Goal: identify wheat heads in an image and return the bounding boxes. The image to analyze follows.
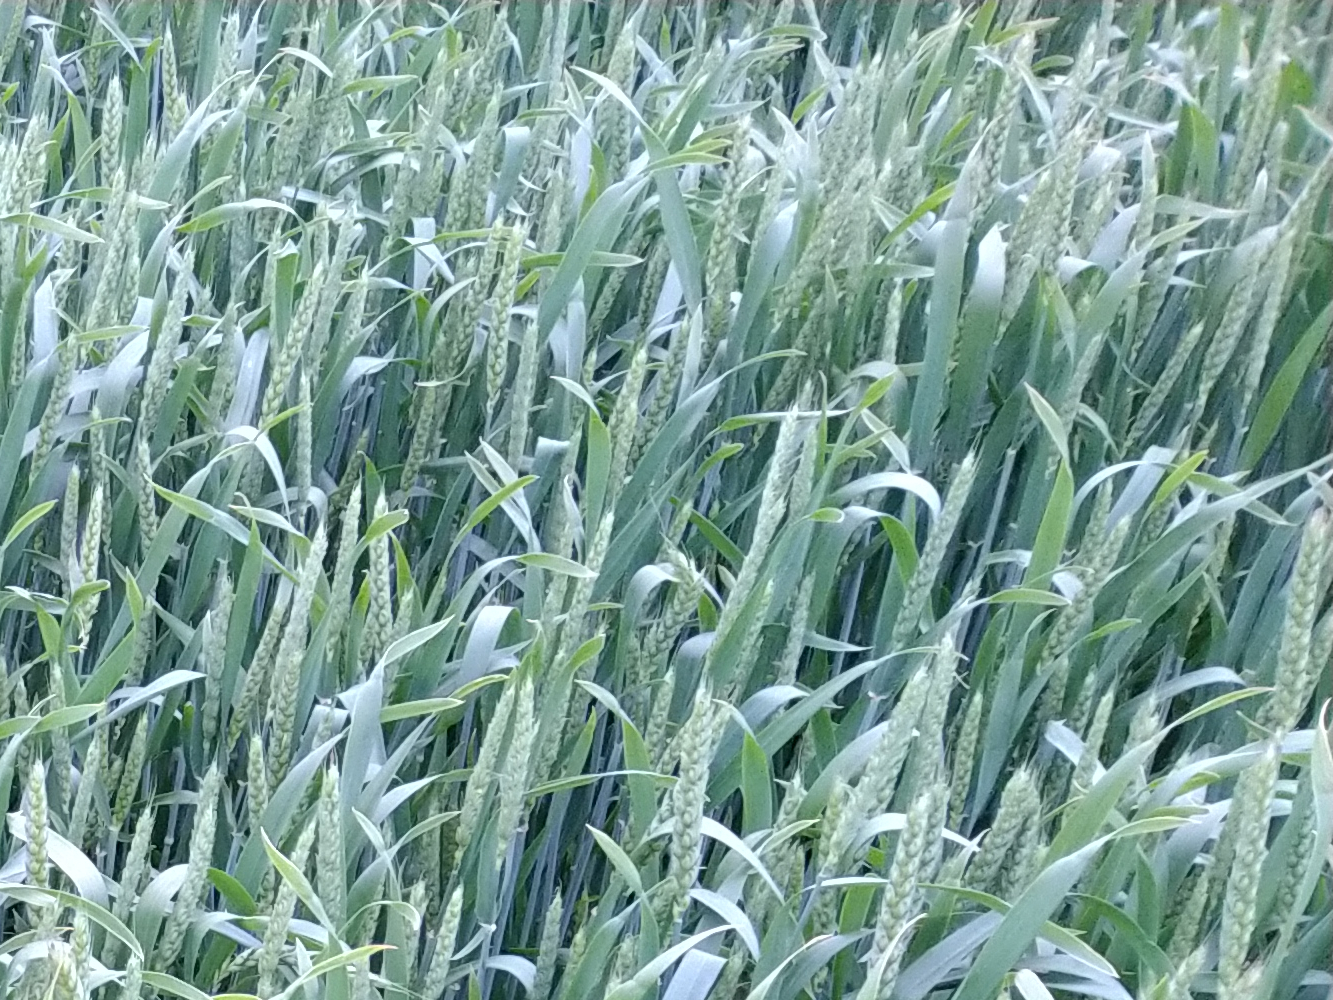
[1238,246,1294,398]
[1079,180,1102,228]
[169,95,190,127]
[1001,807,1041,901]
[359,876,387,948]
[2,1,28,64]
[50,668,71,805]
[325,486,363,649]
[227,212,246,288]
[248,735,265,827]
[438,375,453,420]
[790,429,818,521]
[1246,174,1269,236]
[1195,22,1219,65]
[623,631,639,717]
[218,120,246,197]
[817,104,860,205]
[301,27,318,100]
[0,223,18,293]
[907,169,922,214]
[748,0,767,38]
[137,442,157,556]
[269,527,327,705]
[430,290,462,377]
[262,267,324,420]
[611,877,681,987]
[448,299,475,370]
[475,223,505,304]
[101,77,122,182]
[0,144,19,220]
[948,693,983,830]
[284,0,305,40]
[797,183,871,310]
[202,581,234,741]
[1127,325,1201,438]
[552,930,589,1000]
[1042,137,1084,271]
[758,303,822,419]
[1295,614,1333,714]
[975,37,1037,220]
[389,162,413,239]
[227,592,288,741]
[444,63,467,127]
[1279,200,1317,310]
[517,673,566,837]
[1258,126,1288,226]
[1124,66,1163,129]
[887,163,918,205]
[758,406,801,528]
[635,574,703,685]
[160,32,174,144]
[1143,90,1166,123]
[630,322,690,468]
[639,238,671,325]
[457,687,515,844]
[610,406,636,504]
[412,157,446,216]
[16,679,35,784]
[562,348,595,435]
[266,94,310,230]
[1074,285,1095,319]
[61,465,80,562]
[314,211,331,267]
[524,894,563,1000]
[603,0,628,65]
[1006,172,1052,272]
[110,957,141,1000]
[1272,786,1318,925]
[0,658,9,756]
[83,47,100,88]
[86,200,134,340]
[1077,481,1114,565]
[444,156,471,241]
[943,291,972,393]
[712,694,734,757]
[402,385,437,489]
[1082,77,1121,149]
[908,638,957,800]
[1125,694,1155,760]
[747,778,804,915]
[153,806,219,969]
[466,20,506,117]
[1218,758,1278,992]
[1185,43,1198,102]
[550,0,571,92]
[604,352,646,450]
[73,740,103,844]
[1073,23,1096,72]
[591,90,608,154]
[316,0,329,22]
[711,502,782,650]
[11,299,26,388]
[1113,385,1133,444]
[608,33,634,179]
[1134,257,1170,344]
[532,3,553,73]
[25,761,50,922]
[507,324,538,468]
[279,27,304,74]
[267,654,303,792]
[656,955,743,1000]
[34,157,48,211]
[85,171,121,306]
[113,714,150,824]
[999,196,1050,323]
[418,793,440,894]
[90,407,104,487]
[1230,65,1285,197]
[1067,694,1115,816]
[4,119,43,211]
[815,788,837,872]
[386,593,415,695]
[180,0,204,62]
[670,700,715,918]
[699,256,738,371]
[54,218,77,305]
[823,675,929,857]
[889,458,978,648]
[657,502,692,567]
[1028,660,1070,747]
[1205,804,1241,908]
[783,849,804,909]
[248,266,260,297]
[864,283,888,360]
[1269,513,1328,726]
[194,118,220,184]
[644,671,676,762]
[541,528,573,627]
[1041,674,1096,806]
[776,574,816,686]
[589,228,645,329]
[337,956,363,1000]
[1047,337,1103,465]
[341,279,367,355]
[97,707,109,789]
[255,875,275,921]
[121,231,141,326]
[1231,101,1259,174]
[1133,177,1157,249]
[210,313,238,417]
[720,584,775,703]
[67,908,95,983]
[959,53,998,110]
[873,165,895,206]
[1108,158,1126,199]
[36,114,49,131]
[170,172,187,222]
[559,515,614,655]
[1240,227,1295,333]
[104,810,155,962]
[354,21,375,81]
[1195,260,1254,400]
[121,601,154,690]
[365,498,392,659]
[538,177,563,249]
[1191,518,1233,622]
[496,681,536,858]
[1087,183,1113,230]
[272,96,298,165]
[143,136,157,184]
[763,2,796,72]
[415,885,464,1000]
[294,372,311,501]
[775,194,854,319]
[31,336,79,477]
[962,774,1033,898]
[811,875,835,993]
[1225,204,1249,256]
[240,416,272,506]
[307,203,354,365]
[645,730,678,794]
[1041,520,1130,663]
[607,937,638,996]
[257,821,316,982]
[1201,221,1229,268]
[404,883,425,976]
[524,118,566,200]
[79,486,103,624]
[755,161,786,244]
[299,61,348,169]
[501,120,548,227]
[637,788,672,856]
[1166,877,1212,968]
[704,127,751,292]
[862,794,932,1000]
[814,70,861,181]
[192,760,222,821]
[855,65,882,163]
[652,875,705,951]
[212,12,240,111]
[1052,47,1092,136]
[140,283,187,433]
[329,430,371,514]
[905,787,949,946]
[486,227,525,396]
[564,638,603,749]
[316,769,345,927]
[1130,495,1176,560]
[881,286,903,363]
[1238,0,1287,123]
[468,101,499,229]
[324,101,350,150]
[1267,148,1333,255]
